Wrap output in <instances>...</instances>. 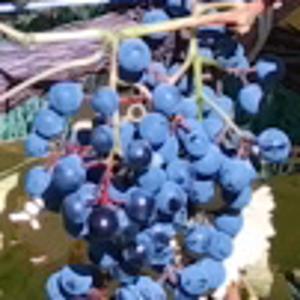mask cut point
<instances>
[{
    "label": "cut point",
    "mask_w": 300,
    "mask_h": 300,
    "mask_svg": "<svg viewBox=\"0 0 300 300\" xmlns=\"http://www.w3.org/2000/svg\"><path fill=\"white\" fill-rule=\"evenodd\" d=\"M191 34L190 58L192 60L195 78H202V52L198 48V31L195 25L189 27Z\"/></svg>",
    "instance_id": "1"
},
{
    "label": "cut point",
    "mask_w": 300,
    "mask_h": 300,
    "mask_svg": "<svg viewBox=\"0 0 300 300\" xmlns=\"http://www.w3.org/2000/svg\"><path fill=\"white\" fill-rule=\"evenodd\" d=\"M246 4L240 1H217V2H205L201 3L197 1L195 6L192 8V15L197 17L208 9H220V8H237L244 9Z\"/></svg>",
    "instance_id": "2"
}]
</instances>
